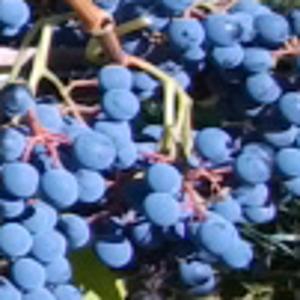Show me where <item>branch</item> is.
<instances>
[{
	"label": "branch",
	"instance_id": "branch-1",
	"mask_svg": "<svg viewBox=\"0 0 300 300\" xmlns=\"http://www.w3.org/2000/svg\"><path fill=\"white\" fill-rule=\"evenodd\" d=\"M67 3L75 11L81 13V19L102 41L112 64L126 66L124 58L127 54L117 42L114 24L110 20L109 13L100 9L93 0H67Z\"/></svg>",
	"mask_w": 300,
	"mask_h": 300
}]
</instances>
